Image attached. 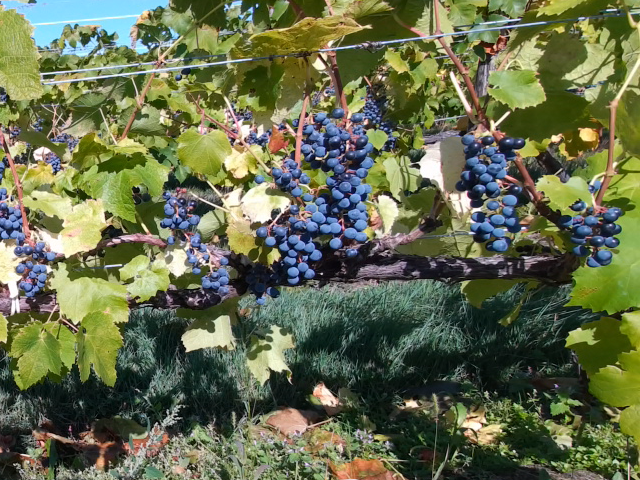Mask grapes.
Wrapping results in <instances>:
<instances>
[{
	"label": "grapes",
	"mask_w": 640,
	"mask_h": 480,
	"mask_svg": "<svg viewBox=\"0 0 640 480\" xmlns=\"http://www.w3.org/2000/svg\"><path fill=\"white\" fill-rule=\"evenodd\" d=\"M26 269H31L29 273L26 275L27 280L36 279V285L33 282L20 281L19 288L24 290L25 296L33 297L36 293L40 292V289L46 287L47 282V274L44 273L47 271L46 264H34L32 261H27L25 263H19L16 267V272L19 274H23Z\"/></svg>",
	"instance_id": "obj_8"
},
{
	"label": "grapes",
	"mask_w": 640,
	"mask_h": 480,
	"mask_svg": "<svg viewBox=\"0 0 640 480\" xmlns=\"http://www.w3.org/2000/svg\"><path fill=\"white\" fill-rule=\"evenodd\" d=\"M229 280L230 273L225 269H219L212 272L210 276L203 275L201 277L202 289L214 288L220 297H224L228 294L227 283Z\"/></svg>",
	"instance_id": "obj_9"
},
{
	"label": "grapes",
	"mask_w": 640,
	"mask_h": 480,
	"mask_svg": "<svg viewBox=\"0 0 640 480\" xmlns=\"http://www.w3.org/2000/svg\"><path fill=\"white\" fill-rule=\"evenodd\" d=\"M312 121L315 124L303 125V134L307 135V139L301 141V153L312 169H321L324 173L332 171L334 176L325 179L329 193L320 194L314 204L304 207L309 217L304 221L297 216L288 218L290 230L303 232L302 235H287L289 228L277 224L272 226L275 235H270L267 226L255 229V235L264 239L265 247L278 246L285 255L282 260L272 261L271 269L257 264L245 278L249 286L270 298L279 296V290L273 287L275 285L287 283L290 287H297L302 276L306 280L315 277L316 271L309 267L308 261L319 262L323 259L317 244L312 241L319 235L332 236L328 242L332 250H340L344 245L339 237L342 234L346 240L356 243H366L369 239L366 232L369 229V212L365 203L374 187L361 184V180L368 176V169L374 166V159L367 157L374 151L373 144L368 142L367 134H360L354 143L356 151L345 154V158L352 162L346 168L339 158L346 151V141L351 138V133L333 124L325 112L316 113ZM342 210L351 224L344 232L339 222Z\"/></svg>",
	"instance_id": "obj_1"
},
{
	"label": "grapes",
	"mask_w": 640,
	"mask_h": 480,
	"mask_svg": "<svg viewBox=\"0 0 640 480\" xmlns=\"http://www.w3.org/2000/svg\"><path fill=\"white\" fill-rule=\"evenodd\" d=\"M501 200L502 214L491 213L488 217L481 211H474L471 214L473 223L469 230H474L473 241L475 243H485L487 251L504 253L511 247V238L505 236L502 228L506 226L510 234L519 233L522 226L519 224V217L516 209L527 206L530 202L529 194L521 185L511 183Z\"/></svg>",
	"instance_id": "obj_3"
},
{
	"label": "grapes",
	"mask_w": 640,
	"mask_h": 480,
	"mask_svg": "<svg viewBox=\"0 0 640 480\" xmlns=\"http://www.w3.org/2000/svg\"><path fill=\"white\" fill-rule=\"evenodd\" d=\"M613 260V252L607 249H599L594 256H589L585 265L589 268H597L609 265Z\"/></svg>",
	"instance_id": "obj_10"
},
{
	"label": "grapes",
	"mask_w": 640,
	"mask_h": 480,
	"mask_svg": "<svg viewBox=\"0 0 640 480\" xmlns=\"http://www.w3.org/2000/svg\"><path fill=\"white\" fill-rule=\"evenodd\" d=\"M161 198L166 200V204L163 206V211L167 216L160 221V228L162 230H165L167 227H169L170 230H185L190 226L198 225L200 223L201 216L199 214L189 215L187 211L190 207H197V202L194 199H190L186 202L185 197L177 198L168 190H165L161 194Z\"/></svg>",
	"instance_id": "obj_6"
},
{
	"label": "grapes",
	"mask_w": 640,
	"mask_h": 480,
	"mask_svg": "<svg viewBox=\"0 0 640 480\" xmlns=\"http://www.w3.org/2000/svg\"><path fill=\"white\" fill-rule=\"evenodd\" d=\"M573 211H584L586 209V202L583 199L576 200L573 205L569 206ZM594 213L593 207L586 209L587 217L583 220L581 214L575 216L562 215L559 224L562 227H571L575 229V235L570 237L572 244H577L572 249V256L576 258H584L588 256V249L585 245L589 241V245L594 248H617L620 245V239L613 237L619 235L622 232V226L616 224V222L622 217L623 210L621 207H610L605 212ZM602 218V224L600 227V235L594 234L593 228L599 224V219Z\"/></svg>",
	"instance_id": "obj_4"
},
{
	"label": "grapes",
	"mask_w": 640,
	"mask_h": 480,
	"mask_svg": "<svg viewBox=\"0 0 640 480\" xmlns=\"http://www.w3.org/2000/svg\"><path fill=\"white\" fill-rule=\"evenodd\" d=\"M24 236L19 205L8 207L6 202H0V242L3 239H15L17 246L13 248V253L17 257H21L24 253L26 256H31L33 261L46 259L48 262H54L56 260L54 251L43 250L46 247L45 241L38 242L34 247L23 245Z\"/></svg>",
	"instance_id": "obj_5"
},
{
	"label": "grapes",
	"mask_w": 640,
	"mask_h": 480,
	"mask_svg": "<svg viewBox=\"0 0 640 480\" xmlns=\"http://www.w3.org/2000/svg\"><path fill=\"white\" fill-rule=\"evenodd\" d=\"M285 168L289 173H285L281 168L272 167L271 173L276 178L275 183L279 187H283L286 191L292 194L295 198H300L303 202H311L313 195L311 193H304L301 188L296 187V183L293 178H297L300 183L309 184L311 178L303 173L301 169L297 168L295 161V151H290V158L285 159Z\"/></svg>",
	"instance_id": "obj_7"
},
{
	"label": "grapes",
	"mask_w": 640,
	"mask_h": 480,
	"mask_svg": "<svg viewBox=\"0 0 640 480\" xmlns=\"http://www.w3.org/2000/svg\"><path fill=\"white\" fill-rule=\"evenodd\" d=\"M202 235L200 233H195L190 237V243L193 248H198L200 253H205L207 251L206 245H201Z\"/></svg>",
	"instance_id": "obj_11"
},
{
	"label": "grapes",
	"mask_w": 640,
	"mask_h": 480,
	"mask_svg": "<svg viewBox=\"0 0 640 480\" xmlns=\"http://www.w3.org/2000/svg\"><path fill=\"white\" fill-rule=\"evenodd\" d=\"M474 134H465L461 137V143L465 146L464 171L459 175V181L455 185L457 192H466L470 199L471 209L481 208L484 194L490 199L501 196L502 189L496 179H505L509 171L505 169L507 162L517 159L515 150L525 147L523 138L510 136L503 137L498 147L491 145L496 141L492 135H484L481 142H477Z\"/></svg>",
	"instance_id": "obj_2"
}]
</instances>
